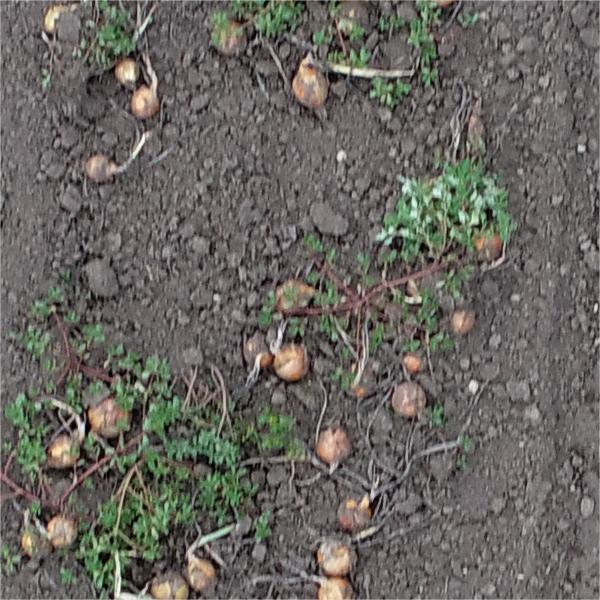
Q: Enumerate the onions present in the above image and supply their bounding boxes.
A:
[112,55,140,84]
[272,343,306,379]
[242,332,269,361]
[449,112,483,144]
[338,493,370,529]
[38,7,63,34]
[87,396,125,435]
[316,576,351,599]
[449,306,477,333]
[316,538,352,573]
[364,345,397,378]
[215,26,243,56]
[279,279,313,312]
[46,514,76,547]
[402,281,420,300]
[20,523,47,556]
[85,153,115,182]
[313,425,350,462]
[389,383,424,417]
[185,552,218,588]
[400,351,423,375]
[147,572,189,598]
[291,58,327,107]
[348,380,371,399]
[45,431,78,466]
[128,84,158,116]
[471,229,503,259]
